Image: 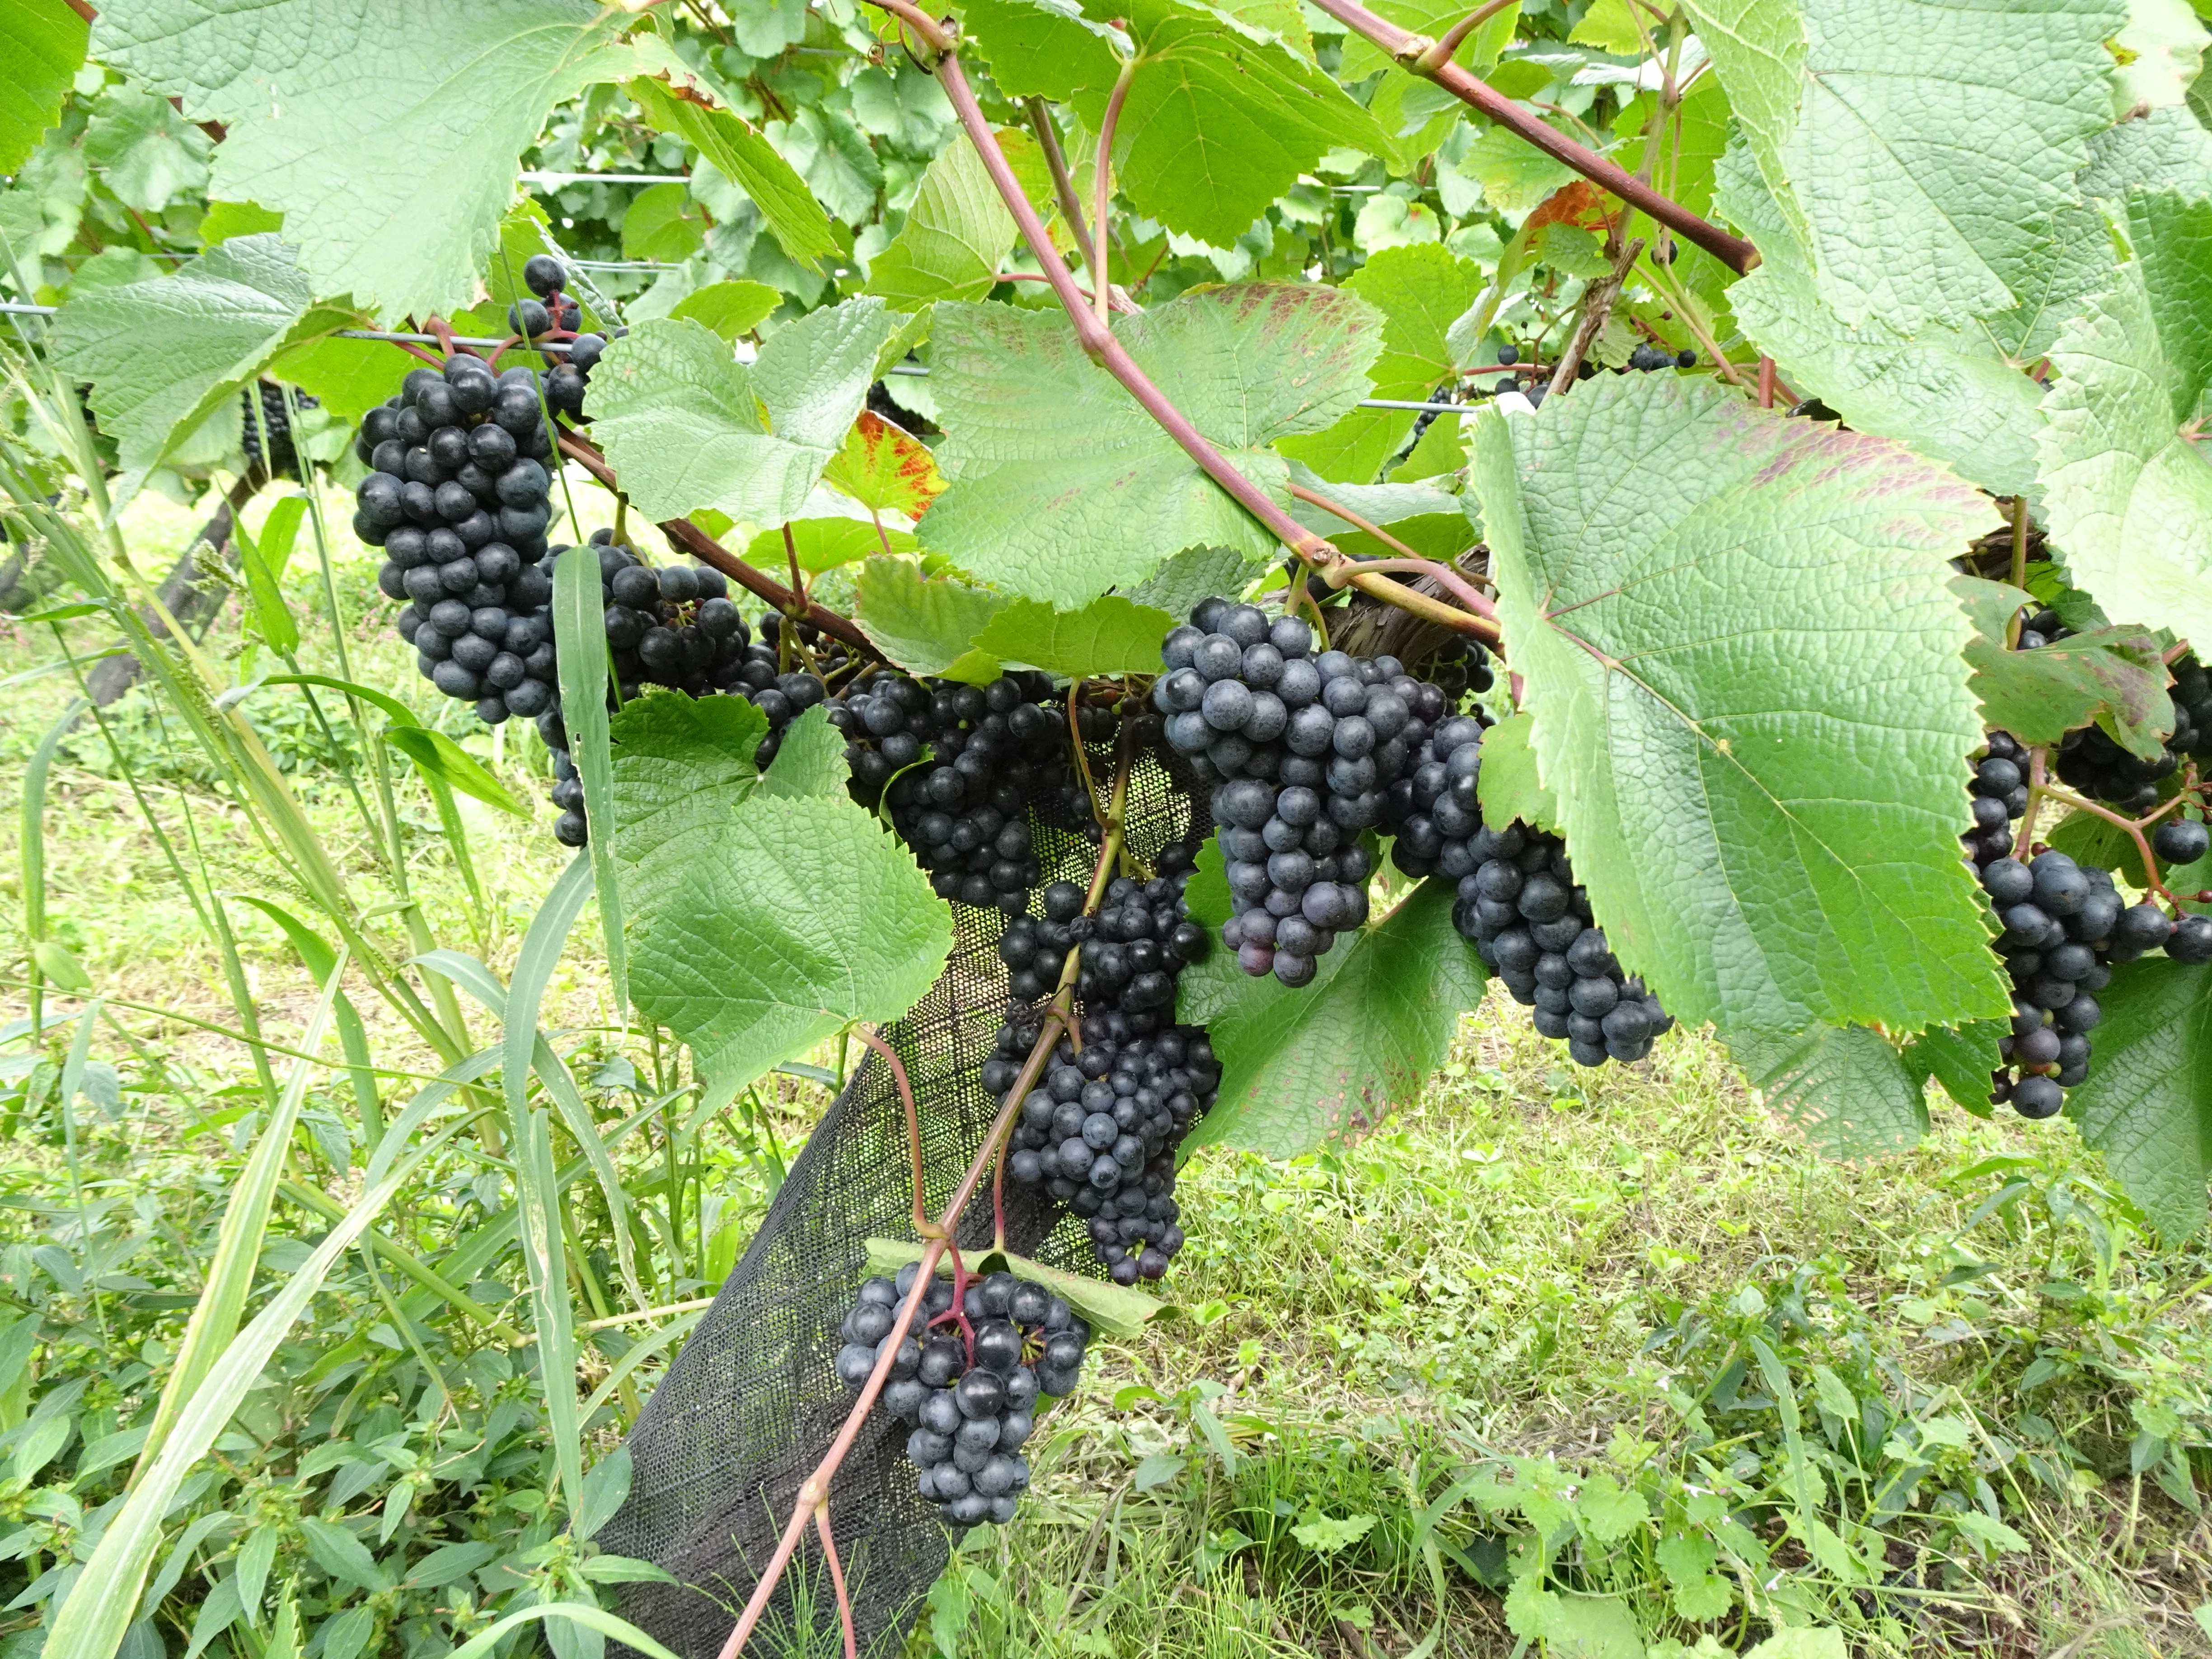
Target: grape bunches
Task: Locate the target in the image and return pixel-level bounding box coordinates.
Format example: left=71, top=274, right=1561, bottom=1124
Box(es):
left=756, top=613, right=867, bottom=684
left=1960, top=731, right=2050, bottom=881
left=846, top=668, right=1064, bottom=916
left=1405, top=636, right=1494, bottom=700
left=981, top=1008, right=1222, bottom=1285
left=2119, top=819, right=2212, bottom=965
left=1982, top=851, right=2144, bottom=1121
left=706, top=644, right=852, bottom=772
left=836, top=1262, right=1092, bottom=1528
left=353, top=353, right=558, bottom=724
left=1000, top=840, right=1208, bottom=1038
left=1387, top=704, right=1675, bottom=1069
left=1496, top=320, right=1560, bottom=410
left=1627, top=310, right=1697, bottom=373
left=535, top=529, right=749, bottom=846
left=1040, top=682, right=1164, bottom=849
left=509, top=254, right=629, bottom=424
left=2020, top=605, right=2078, bottom=652
left=1152, top=597, right=1446, bottom=988
left=2056, top=656, right=2212, bottom=813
